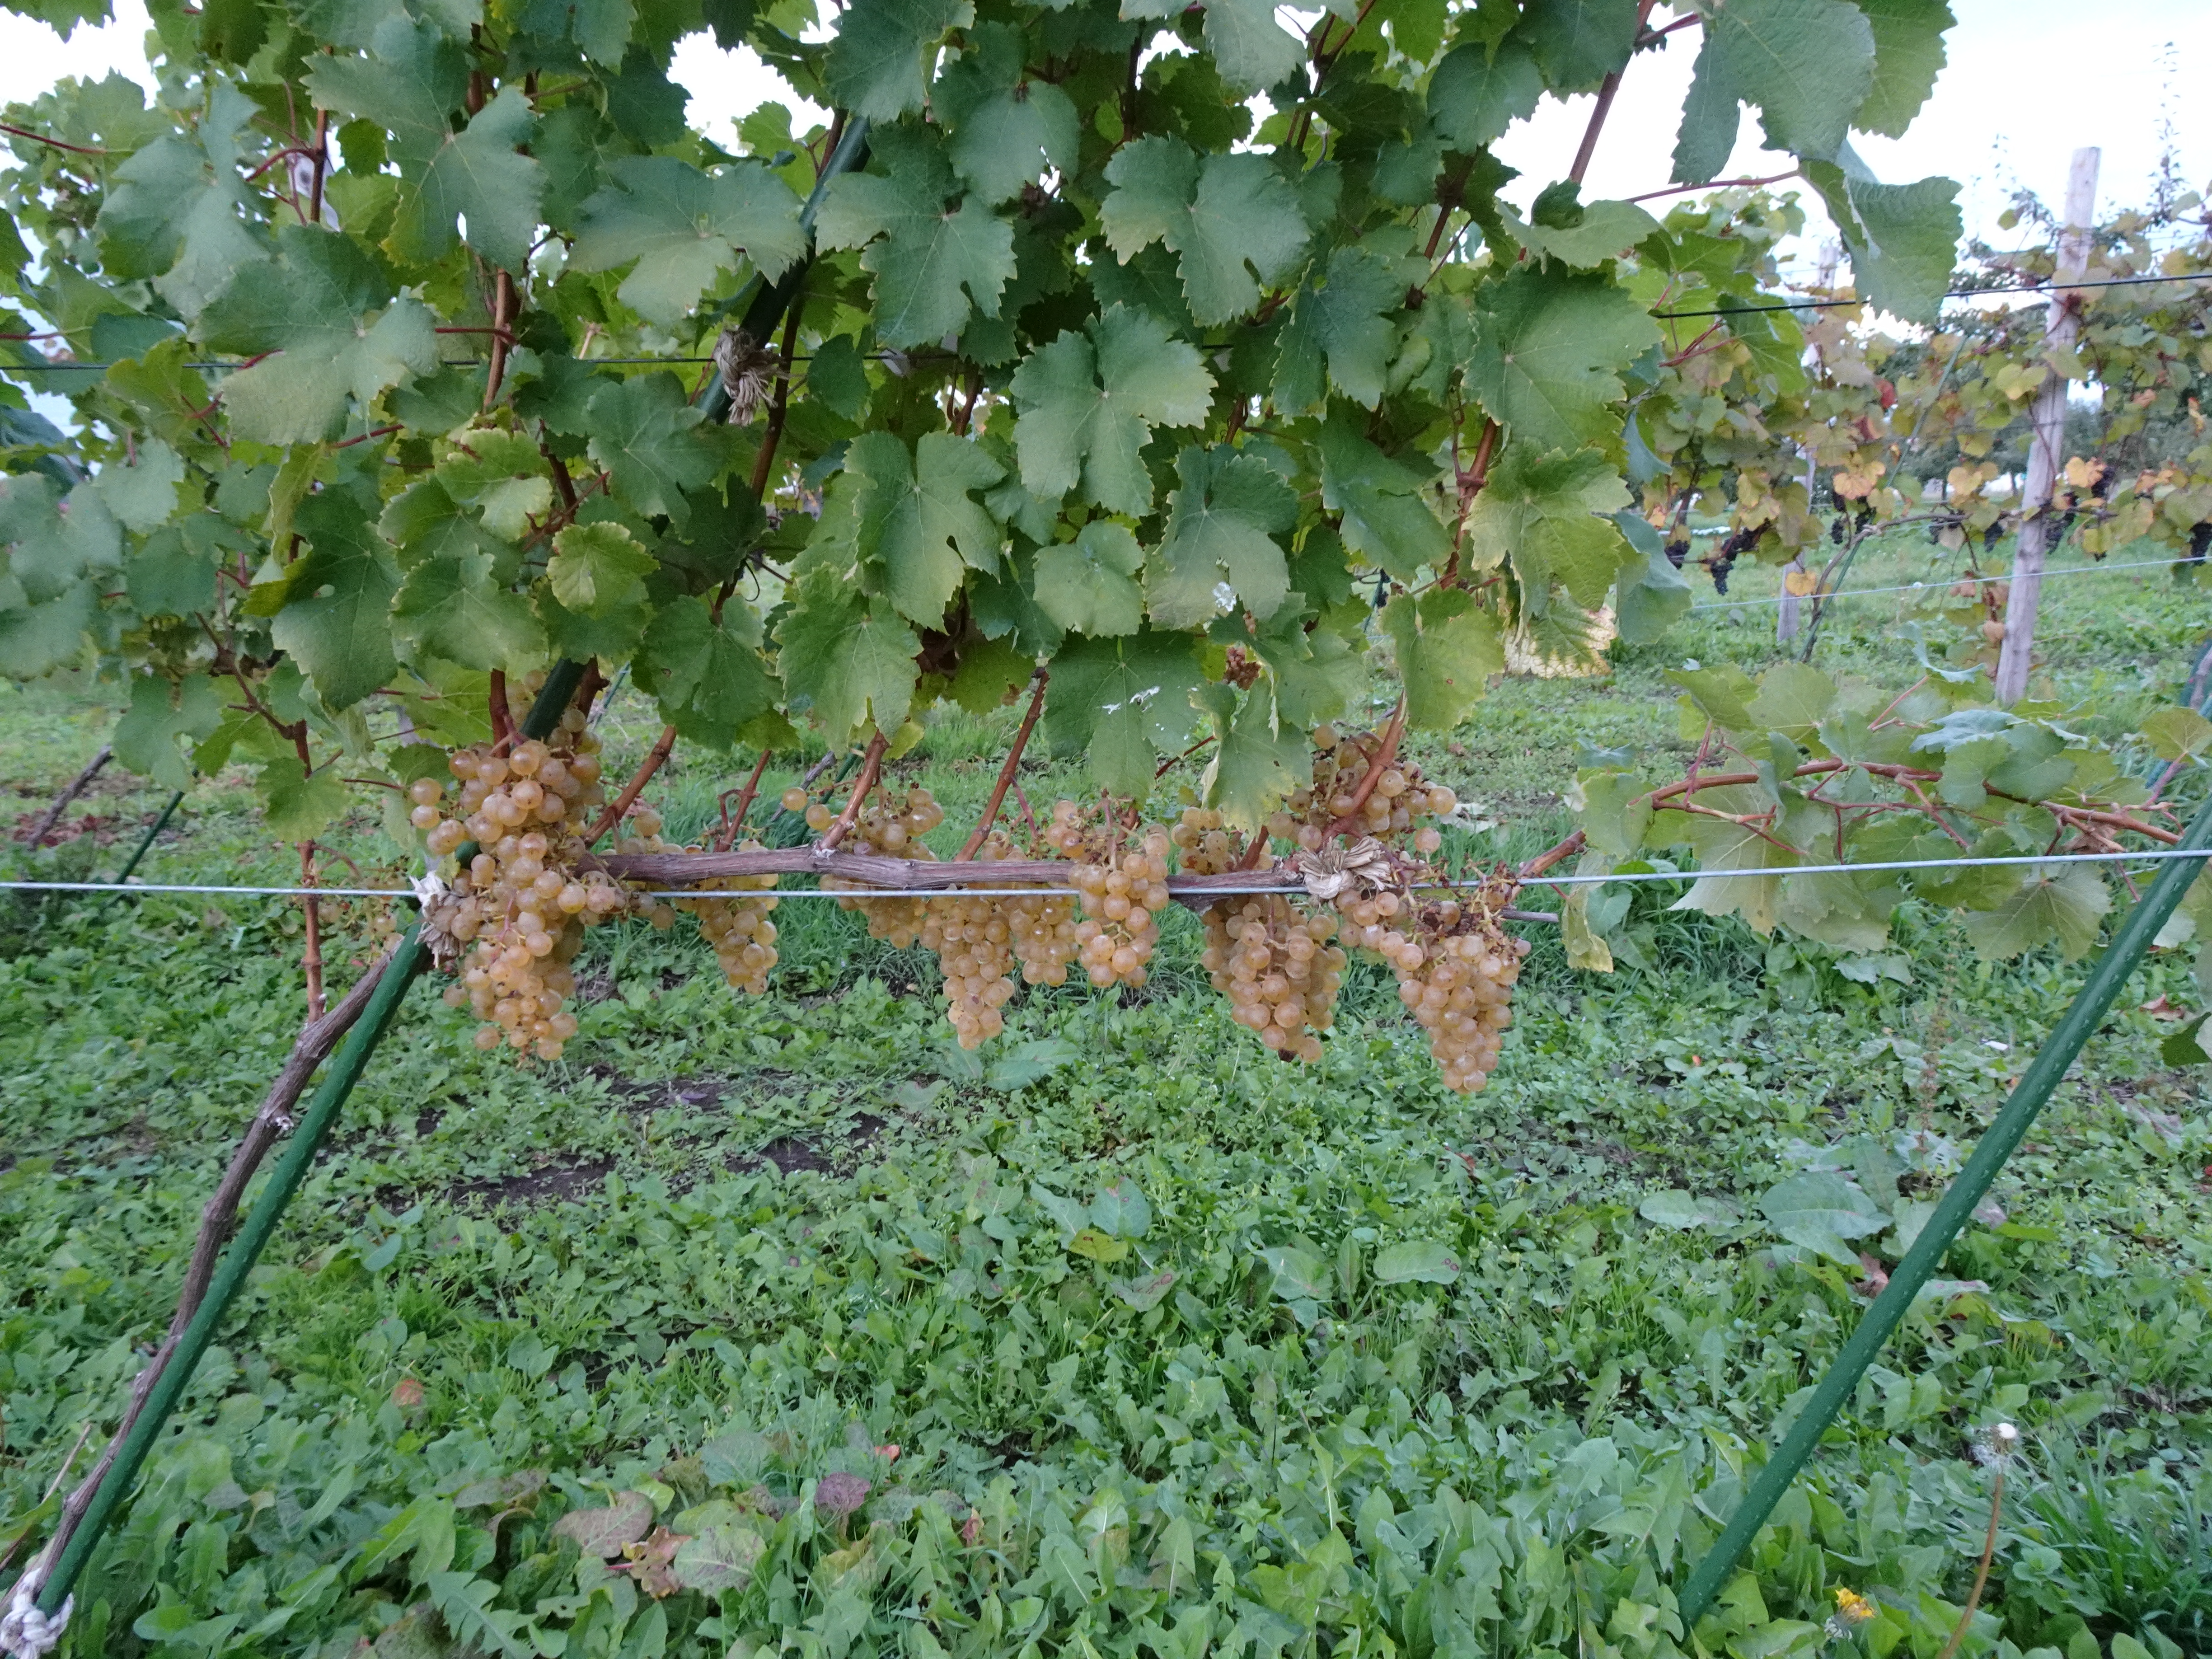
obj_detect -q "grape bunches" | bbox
[1170,803,1283,874]
[1221,642,1262,695]
[1470,872,1517,917]
[1849,503,1879,536]
[505,672,605,778]
[1332,886,1466,974]
[1826,488,1853,514]
[1826,516,1856,552]
[1054,799,1171,993]
[984,831,1076,990]
[784,778,950,846]
[1658,535,1696,573]
[1269,790,1327,857]
[2186,517,2212,571]
[2045,513,2068,557]
[677,828,789,1001]
[408,741,618,955]
[924,883,1019,1052]
[318,864,409,956]
[1401,932,1535,1102]
[442,915,591,1058]
[613,799,692,928]
[2090,461,2124,505]
[1983,510,2019,555]
[1204,893,1350,1065]
[1311,717,1472,852]
[820,846,934,957]
[1945,506,1967,534]
[1705,522,1764,597]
